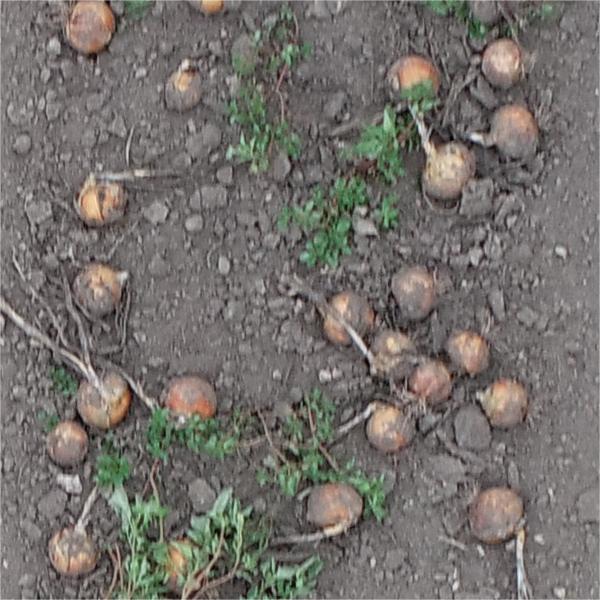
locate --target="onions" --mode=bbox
[73,263,123,312]
[76,179,124,223]
[325,294,371,340]
[163,62,202,108]
[76,375,129,428]
[388,264,437,317]
[407,361,448,403]
[384,54,440,112]
[424,141,473,199]
[444,329,488,373]
[160,541,198,585]
[306,481,359,533]
[47,525,96,574]
[467,487,522,543]
[45,421,89,466]
[373,327,413,368]
[364,403,414,451]
[163,375,217,422]
[488,102,540,159]
[480,378,529,428]
[63,3,115,51]
[195,0,225,16]
[479,39,523,86]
